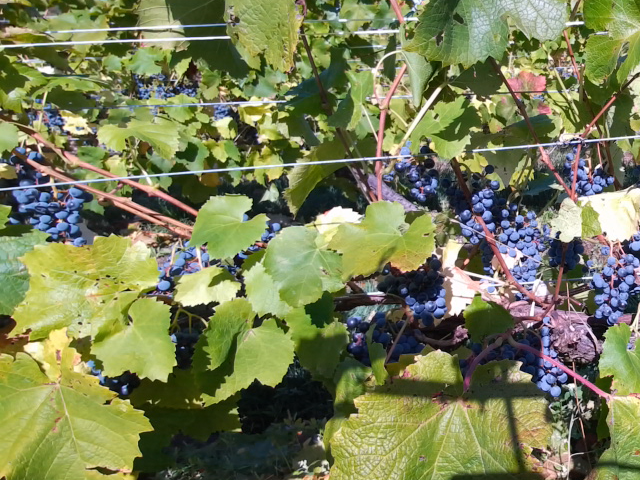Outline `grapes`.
I'll use <instances>...</instances> for the list:
<instances>
[{"instance_id": "54f908b8", "label": "grapes", "mask_w": 640, "mask_h": 480, "mask_svg": "<svg viewBox=\"0 0 640 480\" xmlns=\"http://www.w3.org/2000/svg\"><path fill=\"white\" fill-rule=\"evenodd\" d=\"M10 162L12 164H19L24 168L18 172L19 179L16 180V184L19 185V187L30 186V185L35 186L36 185L35 179H40L41 176L43 175L42 171H37L34 167L29 166L22 159L17 158L16 155H13L10 157Z\"/></svg>"}, {"instance_id": "012428b0", "label": "grapes", "mask_w": 640, "mask_h": 480, "mask_svg": "<svg viewBox=\"0 0 640 480\" xmlns=\"http://www.w3.org/2000/svg\"><path fill=\"white\" fill-rule=\"evenodd\" d=\"M347 326L349 328H355L358 326V331L353 333V338L355 340H360L362 338V334L367 332L370 328V324L368 322H363L361 317H349L347 319Z\"/></svg>"}, {"instance_id": "84f90ec7", "label": "grapes", "mask_w": 640, "mask_h": 480, "mask_svg": "<svg viewBox=\"0 0 640 480\" xmlns=\"http://www.w3.org/2000/svg\"><path fill=\"white\" fill-rule=\"evenodd\" d=\"M620 262L626 265L621 266L618 272H614L616 258L609 256L607 264L603 268V273L606 276H611L613 281H618L620 278L624 279L619 287L613 288L604 277H601L599 272L592 274L593 279L589 283L591 290L603 289V294L594 296V302L599 305L594 311V317L601 319L607 316L606 323L608 325H614L618 321V317L623 315L624 309L628 307V297L640 291V286L635 283L633 271L640 266L639 257L635 254L622 255Z\"/></svg>"}, {"instance_id": "dcf779d0", "label": "grapes", "mask_w": 640, "mask_h": 480, "mask_svg": "<svg viewBox=\"0 0 640 480\" xmlns=\"http://www.w3.org/2000/svg\"><path fill=\"white\" fill-rule=\"evenodd\" d=\"M584 252V246L577 240H572L567 244L565 262L569 270L574 269V265L579 262L578 253Z\"/></svg>"}, {"instance_id": "01657485", "label": "grapes", "mask_w": 640, "mask_h": 480, "mask_svg": "<svg viewBox=\"0 0 640 480\" xmlns=\"http://www.w3.org/2000/svg\"><path fill=\"white\" fill-rule=\"evenodd\" d=\"M13 198L20 204V210L8 213L11 225H19L22 220L34 230L47 233L51 240H58L60 232H68L69 240L74 246H84L86 238L80 235V212L83 203L93 200L91 192L83 193L81 189L71 188L68 204L64 207L54 198L52 191H39L37 188L12 191Z\"/></svg>"}, {"instance_id": "5460f4e3", "label": "grapes", "mask_w": 640, "mask_h": 480, "mask_svg": "<svg viewBox=\"0 0 640 480\" xmlns=\"http://www.w3.org/2000/svg\"><path fill=\"white\" fill-rule=\"evenodd\" d=\"M436 164L432 158H425L423 164L420 165L417 161L398 160L393 168L388 170V174L382 177L384 182L391 181L393 174L398 171L403 172L405 168L406 179L411 183V190L409 194L412 198H416L421 203L426 201L427 194H435L437 188L440 186L438 182L439 172L434 170Z\"/></svg>"}, {"instance_id": "83cd7487", "label": "grapes", "mask_w": 640, "mask_h": 480, "mask_svg": "<svg viewBox=\"0 0 640 480\" xmlns=\"http://www.w3.org/2000/svg\"><path fill=\"white\" fill-rule=\"evenodd\" d=\"M518 362L522 363V370L533 376V383L545 392H549L554 398L562 395V389L558 387L557 380L560 383H566L568 376L559 367L553 365L544 357L527 353L525 356L518 358Z\"/></svg>"}, {"instance_id": "e5b3c951", "label": "grapes", "mask_w": 640, "mask_h": 480, "mask_svg": "<svg viewBox=\"0 0 640 480\" xmlns=\"http://www.w3.org/2000/svg\"><path fill=\"white\" fill-rule=\"evenodd\" d=\"M196 248L191 240H185L183 244L169 254L164 260L162 267L158 269V277L161 280L157 284V289L167 292L171 287V281L179 275L197 272L199 270V260L195 257Z\"/></svg>"}, {"instance_id": "ef6de9ee", "label": "grapes", "mask_w": 640, "mask_h": 480, "mask_svg": "<svg viewBox=\"0 0 640 480\" xmlns=\"http://www.w3.org/2000/svg\"><path fill=\"white\" fill-rule=\"evenodd\" d=\"M540 337L542 338V343L538 337L534 336H528L526 339H518L517 343L530 346L536 351H540L543 346V353L547 358H556L558 356V351L550 347L552 338L550 329L548 327H543L540 332Z\"/></svg>"}, {"instance_id": "b958b902", "label": "grapes", "mask_w": 640, "mask_h": 480, "mask_svg": "<svg viewBox=\"0 0 640 480\" xmlns=\"http://www.w3.org/2000/svg\"><path fill=\"white\" fill-rule=\"evenodd\" d=\"M430 263V270L404 273L397 275L389 274V269L384 268L382 283L377 284L379 292L389 290L403 299V303L413 311L414 318H420L425 327L436 323V319H442L447 312L446 289L443 286L444 277L439 276L437 271L441 268V262L437 255H432L426 259Z\"/></svg>"}, {"instance_id": "f8a65327", "label": "grapes", "mask_w": 640, "mask_h": 480, "mask_svg": "<svg viewBox=\"0 0 640 480\" xmlns=\"http://www.w3.org/2000/svg\"><path fill=\"white\" fill-rule=\"evenodd\" d=\"M498 188L499 183L496 180H490L487 188L481 189L478 193H471L469 195V200L473 205L472 212L475 214H478L479 212L482 213L489 231H494L496 229L493 213L490 211V208L493 206L492 197L494 195V190H497ZM472 212L470 210H462L459 215L454 217V222L456 224H460V233L464 237H469V241L472 244H478L480 242V238L484 236V232L479 221L472 218Z\"/></svg>"}, {"instance_id": "91a60905", "label": "grapes", "mask_w": 640, "mask_h": 480, "mask_svg": "<svg viewBox=\"0 0 640 480\" xmlns=\"http://www.w3.org/2000/svg\"><path fill=\"white\" fill-rule=\"evenodd\" d=\"M515 347H511L509 344L503 345L498 350H494L486 353V358H481L480 365H485L491 360H514L515 359Z\"/></svg>"}, {"instance_id": "802abce8", "label": "grapes", "mask_w": 640, "mask_h": 480, "mask_svg": "<svg viewBox=\"0 0 640 480\" xmlns=\"http://www.w3.org/2000/svg\"><path fill=\"white\" fill-rule=\"evenodd\" d=\"M347 352L349 354H355L357 359L361 363L365 364L367 367H371L372 366V362L369 361L368 347L367 346H362L361 347L356 342H351L347 347Z\"/></svg>"}, {"instance_id": "9fbda902", "label": "grapes", "mask_w": 640, "mask_h": 480, "mask_svg": "<svg viewBox=\"0 0 640 480\" xmlns=\"http://www.w3.org/2000/svg\"><path fill=\"white\" fill-rule=\"evenodd\" d=\"M373 339L376 343H381L382 346H386L391 342V336L387 333H380L377 330L373 331Z\"/></svg>"}, {"instance_id": "1ff8f66d", "label": "grapes", "mask_w": 640, "mask_h": 480, "mask_svg": "<svg viewBox=\"0 0 640 480\" xmlns=\"http://www.w3.org/2000/svg\"><path fill=\"white\" fill-rule=\"evenodd\" d=\"M425 349V344L419 342L412 335H401L398 344L393 348L392 359L396 360L401 354L417 355Z\"/></svg>"}, {"instance_id": "34c12dc5", "label": "grapes", "mask_w": 640, "mask_h": 480, "mask_svg": "<svg viewBox=\"0 0 640 480\" xmlns=\"http://www.w3.org/2000/svg\"><path fill=\"white\" fill-rule=\"evenodd\" d=\"M514 297H515V299H516L517 301H521V302L529 301V300H530V299H529V298H527L525 295H523V294H522V292H520V293H519V292H516V293L514 294Z\"/></svg>"}, {"instance_id": "0513c4c2", "label": "grapes", "mask_w": 640, "mask_h": 480, "mask_svg": "<svg viewBox=\"0 0 640 480\" xmlns=\"http://www.w3.org/2000/svg\"><path fill=\"white\" fill-rule=\"evenodd\" d=\"M517 209L518 205L516 203H510L508 209L504 208L502 210L501 216L504 219L501 222V226L507 229L500 235L502 243L497 247L503 254L509 253L512 258L517 256L515 247L521 250V254L526 256V258L520 264H513L509 272L518 282L535 280L537 278V268L540 266L539 261L542 259L539 252L546 249V244L551 245L548 251V255L551 257L549 264L552 267H556L560 264L562 241L558 239L553 240L549 233L550 227L548 225L542 228L544 232L543 236L539 235L541 228L537 226L538 222L535 220L537 213L532 210L526 212V218L531 221L529 227L518 231H515L513 228H508L510 226V220L507 218L510 215L509 210L515 212Z\"/></svg>"}, {"instance_id": "2adb6a1f", "label": "grapes", "mask_w": 640, "mask_h": 480, "mask_svg": "<svg viewBox=\"0 0 640 480\" xmlns=\"http://www.w3.org/2000/svg\"><path fill=\"white\" fill-rule=\"evenodd\" d=\"M589 169L587 161L580 159L578 161V174L576 190L581 197H588L601 192L604 188H608L615 182L613 175H608L603 169H597L592 172V178H588Z\"/></svg>"}]
</instances>
